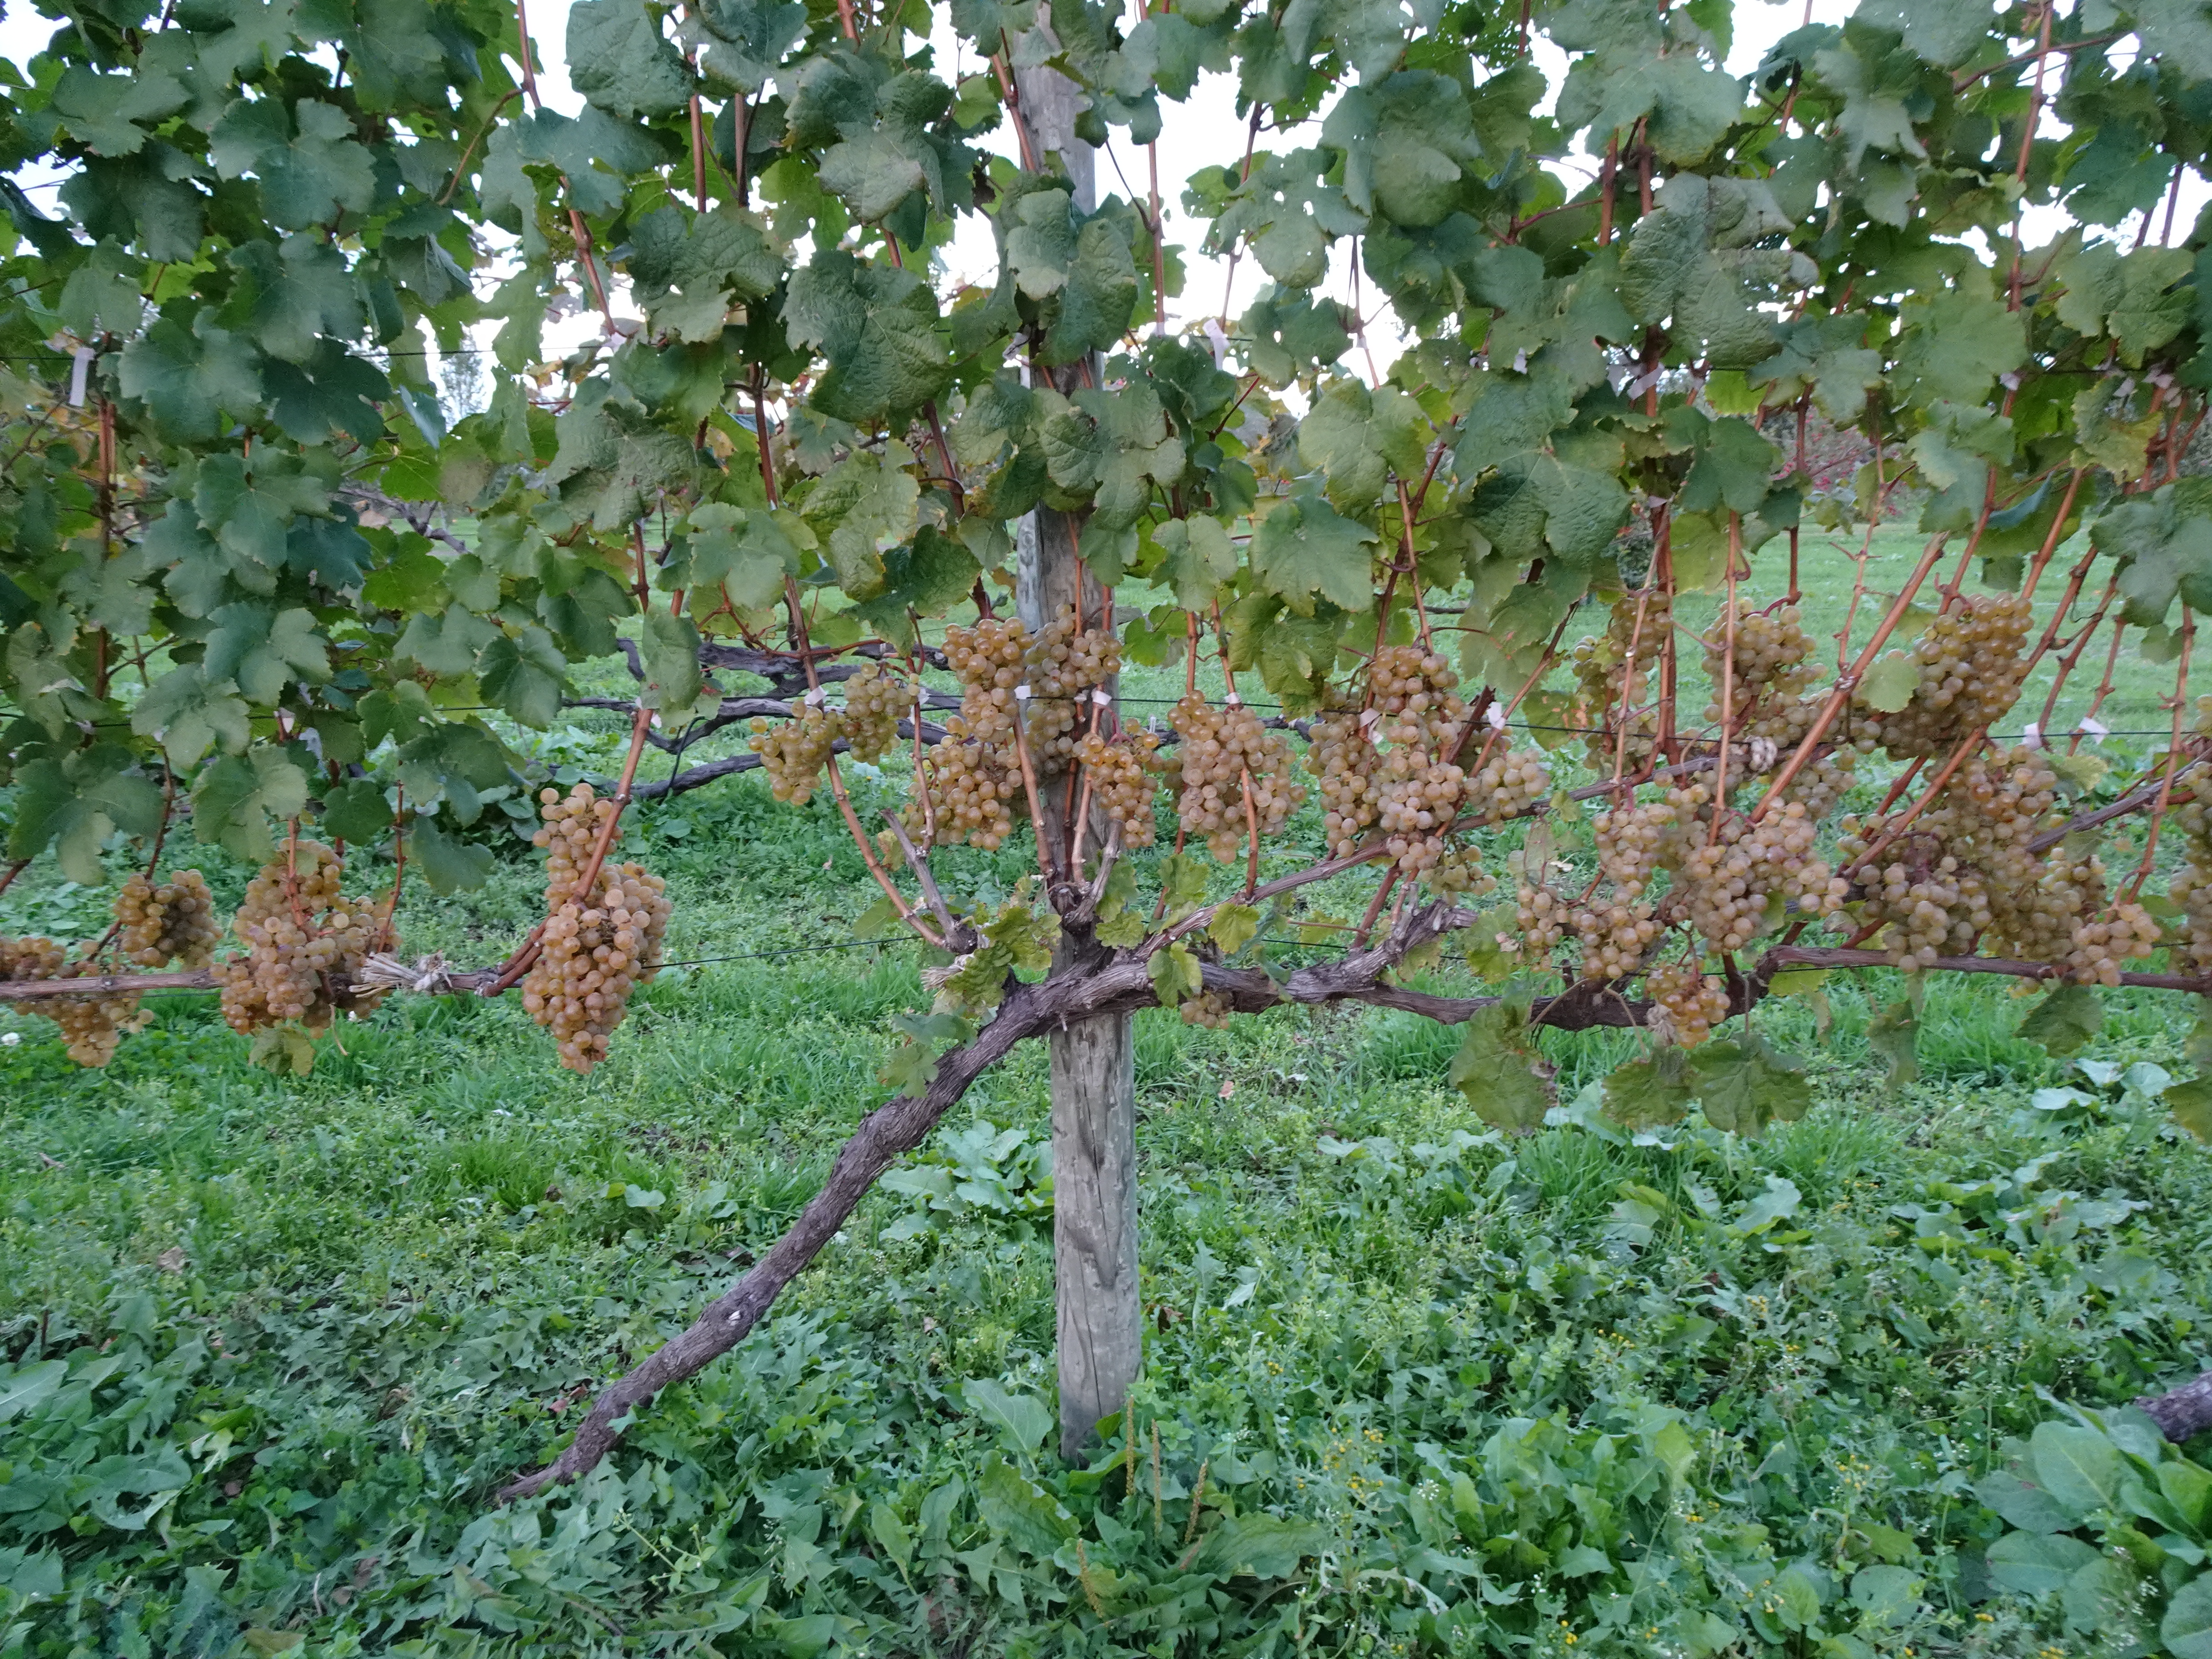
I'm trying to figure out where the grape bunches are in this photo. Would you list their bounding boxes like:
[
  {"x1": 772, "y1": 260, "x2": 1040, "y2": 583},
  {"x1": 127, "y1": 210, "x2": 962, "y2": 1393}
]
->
[
  {"x1": 336, "y1": 896, "x2": 414, "y2": 1014},
  {"x1": 212, "y1": 950, "x2": 256, "y2": 1034},
  {"x1": 1966, "y1": 590, "x2": 2036, "y2": 729},
  {"x1": 995, "y1": 737, "x2": 1026, "y2": 797},
  {"x1": 1300, "y1": 713, "x2": 1381, "y2": 860},
  {"x1": 1700, "y1": 592, "x2": 1752, "y2": 721},
  {"x1": 1070, "y1": 717, "x2": 1163, "y2": 850},
  {"x1": 537, "y1": 904, "x2": 606, "y2": 1022},
  {"x1": 596, "y1": 855, "x2": 675, "y2": 984},
  {"x1": 1881, "y1": 614, "x2": 1974, "y2": 712},
  {"x1": 1590, "y1": 804, "x2": 1668, "y2": 905},
  {"x1": 247, "y1": 917, "x2": 336, "y2": 1040},
  {"x1": 1276, "y1": 680, "x2": 1355, "y2": 724},
  {"x1": 1570, "y1": 901, "x2": 1658, "y2": 984},
  {"x1": 1366, "y1": 637, "x2": 1465, "y2": 768},
  {"x1": 1952, "y1": 839, "x2": 2040, "y2": 958},
  {"x1": 1748, "y1": 682, "x2": 1879, "y2": 758},
  {"x1": 1023, "y1": 706, "x2": 1076, "y2": 778},
  {"x1": 1466, "y1": 702, "x2": 1523, "y2": 763},
  {"x1": 1164, "y1": 745, "x2": 1223, "y2": 835},
  {"x1": 1417, "y1": 842, "x2": 1499, "y2": 910},
  {"x1": 1739, "y1": 796, "x2": 1848, "y2": 917},
  {"x1": 1717, "y1": 605, "x2": 1829, "y2": 696},
  {"x1": 1510, "y1": 884, "x2": 1570, "y2": 976},
  {"x1": 2175, "y1": 757, "x2": 2212, "y2": 892},
  {"x1": 1208, "y1": 803, "x2": 1255, "y2": 870},
  {"x1": 167, "y1": 868, "x2": 224, "y2": 974},
  {"x1": 1570, "y1": 633, "x2": 1620, "y2": 717},
  {"x1": 1861, "y1": 862, "x2": 1957, "y2": 975},
  {"x1": 1880, "y1": 710, "x2": 1942, "y2": 761},
  {"x1": 1838, "y1": 804, "x2": 1883, "y2": 862},
  {"x1": 79, "y1": 940, "x2": 154, "y2": 1035},
  {"x1": 586, "y1": 891, "x2": 639, "y2": 1031},
  {"x1": 1643, "y1": 958, "x2": 1734, "y2": 1054},
  {"x1": 1365, "y1": 766, "x2": 1465, "y2": 883},
  {"x1": 1215, "y1": 701, "x2": 1265, "y2": 783},
  {"x1": 1664, "y1": 845, "x2": 1765, "y2": 957},
  {"x1": 2171, "y1": 867, "x2": 2212, "y2": 993},
  {"x1": 1178, "y1": 982, "x2": 1241, "y2": 1032},
  {"x1": 839, "y1": 663, "x2": 921, "y2": 766},
  {"x1": 1914, "y1": 754, "x2": 1971, "y2": 853},
  {"x1": 1782, "y1": 750, "x2": 1865, "y2": 823},
  {"x1": 952, "y1": 770, "x2": 1016, "y2": 853},
  {"x1": 938, "y1": 616, "x2": 1026, "y2": 744},
  {"x1": 2071, "y1": 898, "x2": 2161, "y2": 988},
  {"x1": 110, "y1": 871, "x2": 172, "y2": 970},
  {"x1": 0, "y1": 936, "x2": 73, "y2": 1017},
  {"x1": 234, "y1": 837, "x2": 344, "y2": 946},
  {"x1": 522, "y1": 954, "x2": 553, "y2": 1033},
  {"x1": 1962, "y1": 745, "x2": 2067, "y2": 845},
  {"x1": 928, "y1": 718, "x2": 998, "y2": 825},
  {"x1": 2191, "y1": 690, "x2": 2212, "y2": 749},
  {"x1": 746, "y1": 694, "x2": 841, "y2": 810},
  {"x1": 526, "y1": 780, "x2": 623, "y2": 914},
  {"x1": 1654, "y1": 765, "x2": 1742, "y2": 862},
  {"x1": 1607, "y1": 592, "x2": 1674, "y2": 710},
  {"x1": 1881, "y1": 829, "x2": 1924, "y2": 872},
  {"x1": 550, "y1": 1011, "x2": 624, "y2": 1077},
  {"x1": 1032, "y1": 598, "x2": 1126, "y2": 698},
  {"x1": 2022, "y1": 848, "x2": 2107, "y2": 979},
  {"x1": 61, "y1": 1003, "x2": 120, "y2": 1069},
  {"x1": 1579, "y1": 711, "x2": 1702, "y2": 773},
  {"x1": 1166, "y1": 689, "x2": 1227, "y2": 755},
  {"x1": 1249, "y1": 735, "x2": 1308, "y2": 841},
  {"x1": 1462, "y1": 746, "x2": 1552, "y2": 833},
  {"x1": 905, "y1": 772, "x2": 968, "y2": 846}
]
